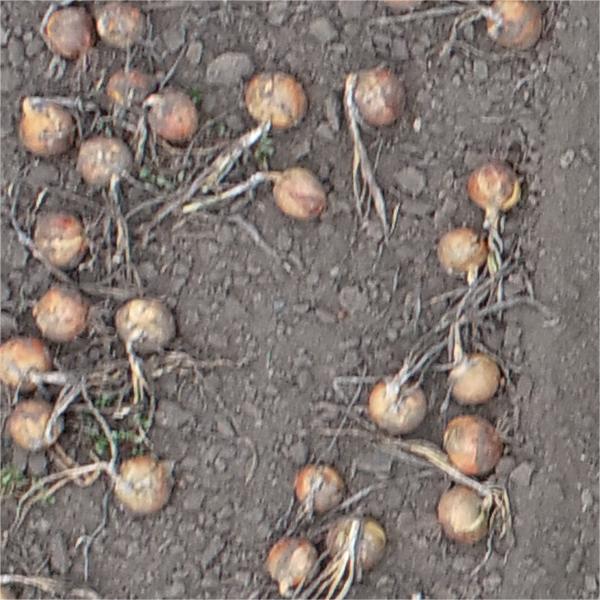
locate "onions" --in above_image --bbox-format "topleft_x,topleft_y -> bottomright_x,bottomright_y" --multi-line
441,415 -> 504,477
95,2 -> 143,46
34,284 -> 88,341
7,401 -> 57,450
347,69 -> 405,128
2,334 -> 50,384
465,163 -> 521,214
110,455 -> 173,514
485,1 -> 542,50
240,72 -> 308,130
293,463 -> 343,512
369,379 -> 423,431
116,298 -> 173,351
330,518 -> 388,572
273,168 -> 324,219
450,352 -> 499,403
34,211 -> 85,268
19,97 -> 77,154
438,486 -> 487,540
76,138 -> 131,186
262,537 -> 318,589
107,67 -> 154,106
436,229 -> 486,275
42,6 -> 92,56
144,90 -> 195,142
